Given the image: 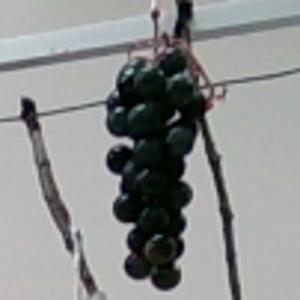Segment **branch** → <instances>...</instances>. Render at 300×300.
<instances>
[{
    "label": "branch",
    "instance_id": "3",
    "mask_svg": "<svg viewBox=\"0 0 300 300\" xmlns=\"http://www.w3.org/2000/svg\"><path fill=\"white\" fill-rule=\"evenodd\" d=\"M176 19L171 26L169 42L186 46L192 61L191 26L194 19V0H174Z\"/></svg>",
    "mask_w": 300,
    "mask_h": 300
},
{
    "label": "branch",
    "instance_id": "1",
    "mask_svg": "<svg viewBox=\"0 0 300 300\" xmlns=\"http://www.w3.org/2000/svg\"><path fill=\"white\" fill-rule=\"evenodd\" d=\"M20 107L19 118L27 128L26 134L32 146L33 164L38 174L42 200L55 229L59 232L65 251L71 257L82 289L85 291L86 300H107L103 291L99 290L97 280L90 270L86 255L75 235L70 209L66 206L54 179L52 162L42 136L36 101L31 96L20 94Z\"/></svg>",
    "mask_w": 300,
    "mask_h": 300
},
{
    "label": "branch",
    "instance_id": "2",
    "mask_svg": "<svg viewBox=\"0 0 300 300\" xmlns=\"http://www.w3.org/2000/svg\"><path fill=\"white\" fill-rule=\"evenodd\" d=\"M201 139L204 146V155L208 170L213 180V192L216 194L218 208L216 211L222 222V243L225 247L224 262L227 270V282L231 300H242V285L240 283L239 253L235 251L236 230L235 213L231 207L229 193L226 189V180L222 165L223 155L218 152L210 129L206 113L198 116Z\"/></svg>",
    "mask_w": 300,
    "mask_h": 300
}]
</instances>
